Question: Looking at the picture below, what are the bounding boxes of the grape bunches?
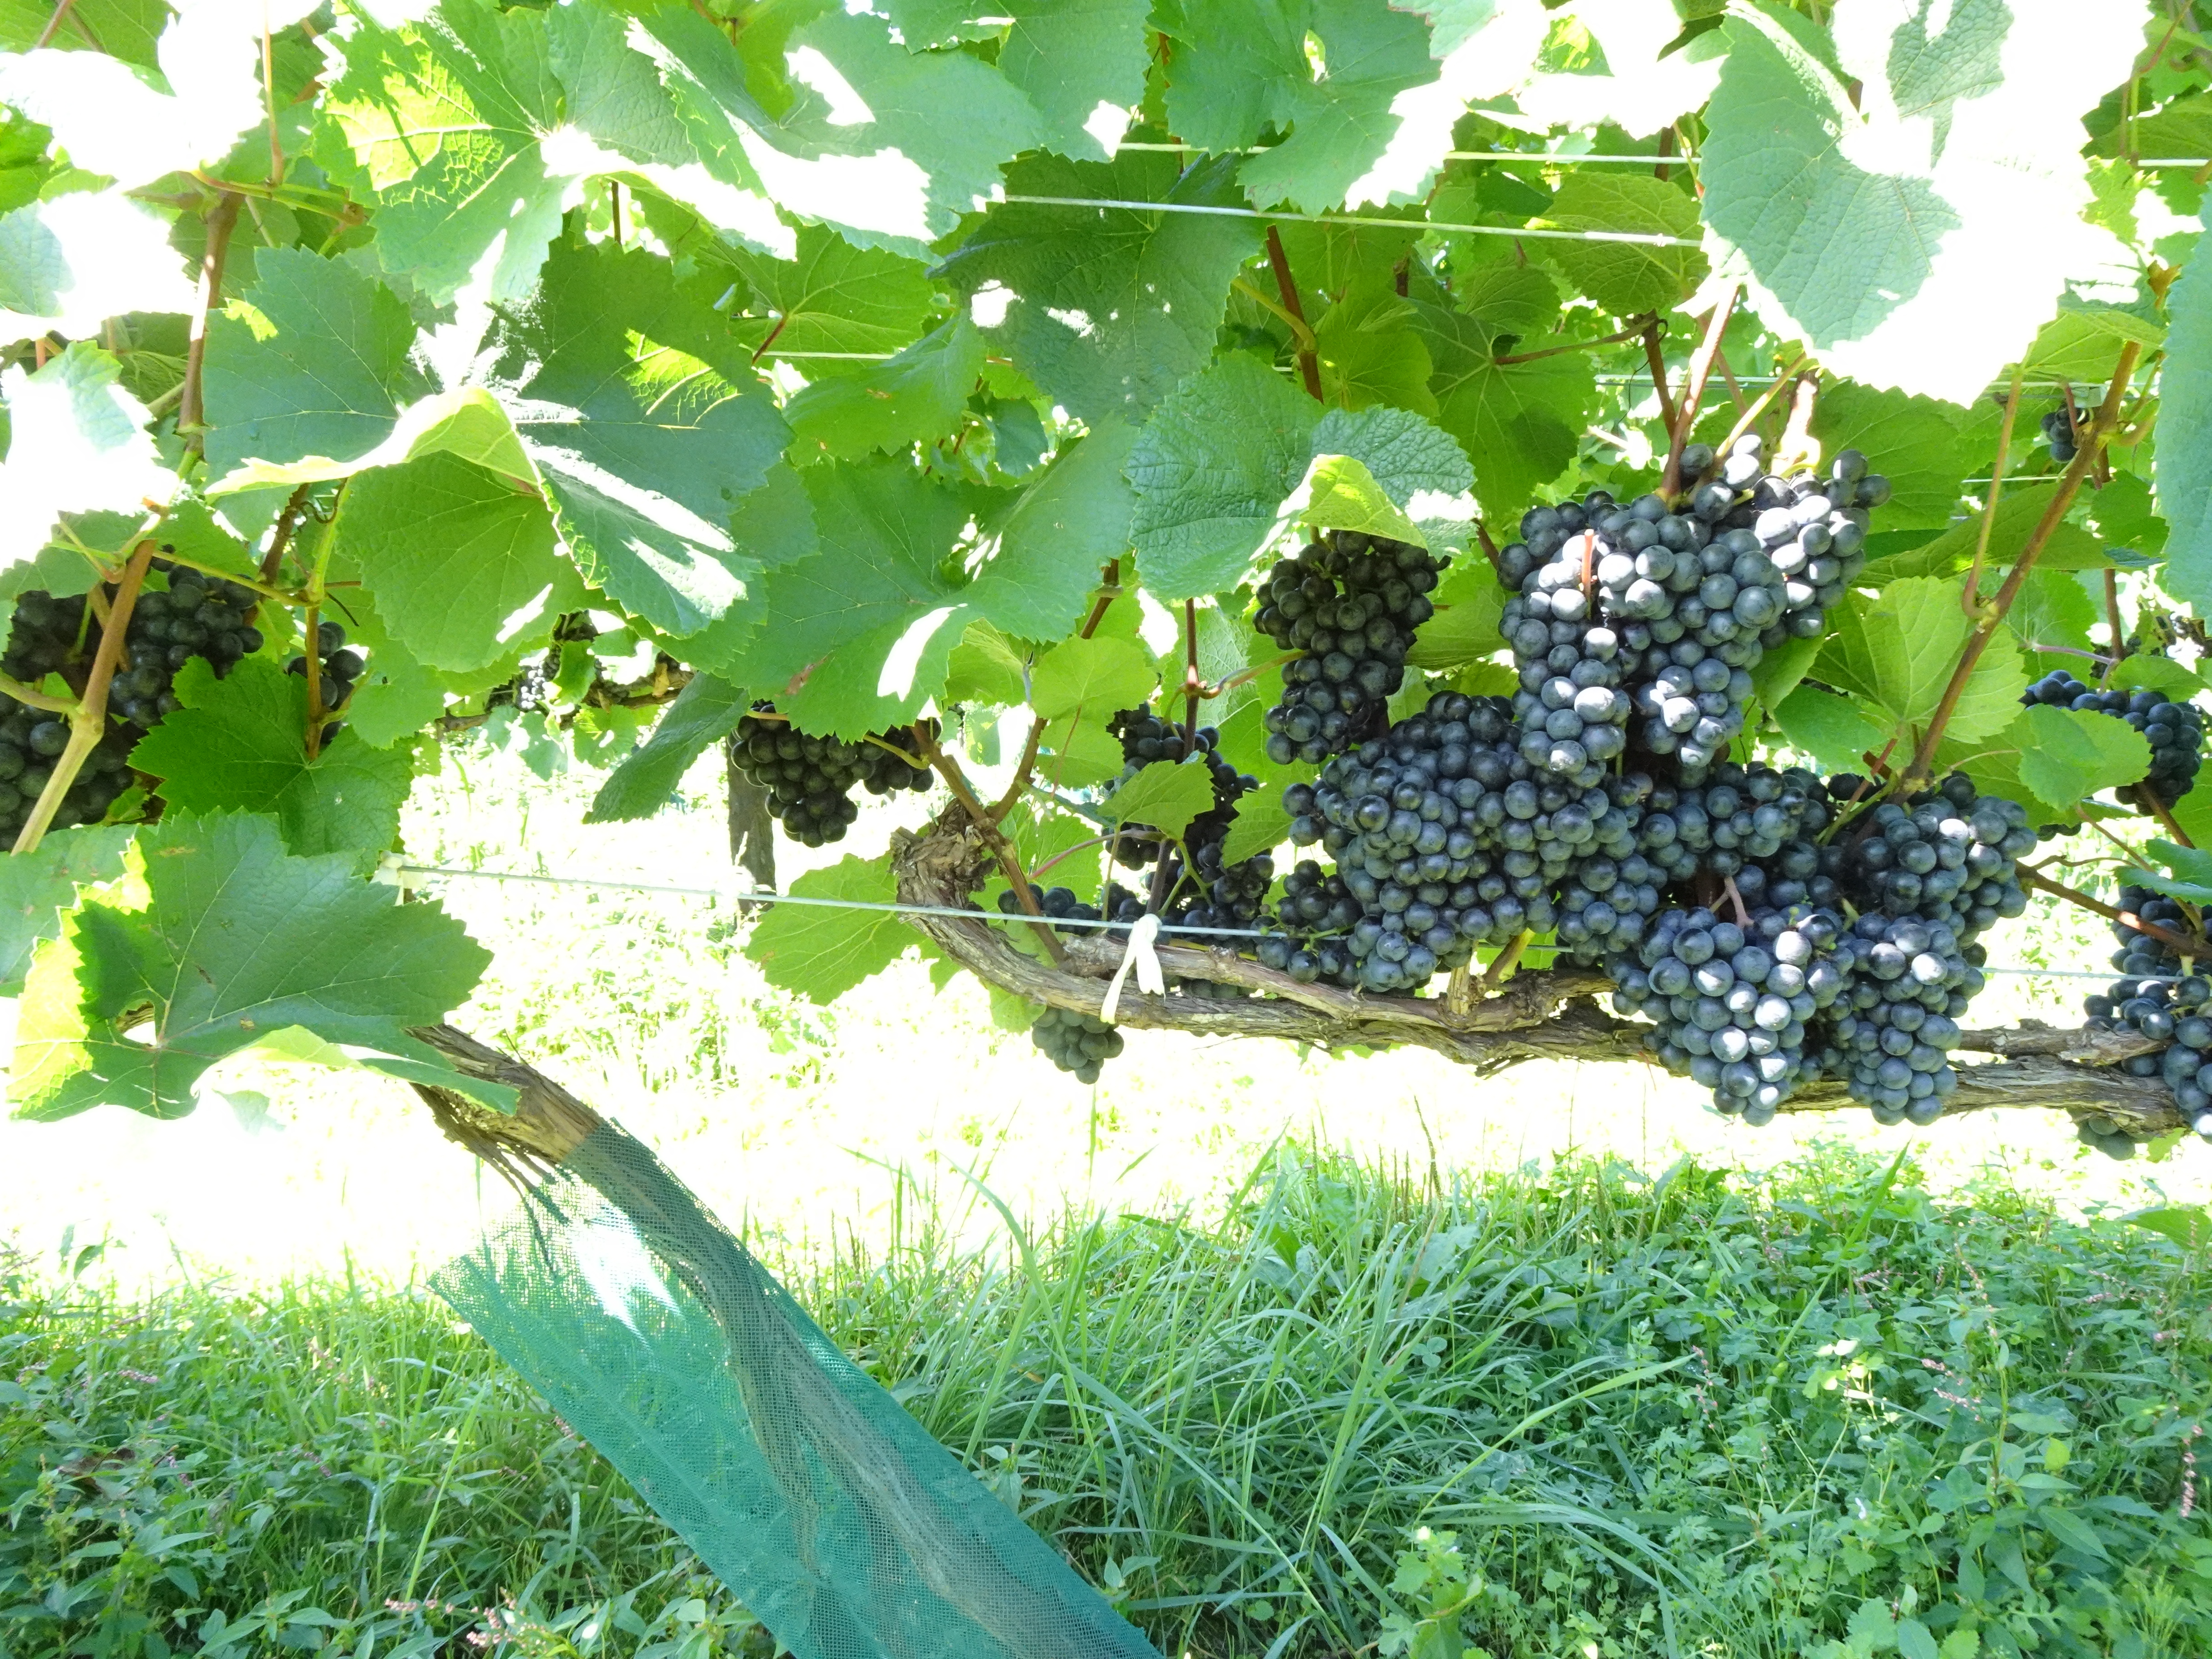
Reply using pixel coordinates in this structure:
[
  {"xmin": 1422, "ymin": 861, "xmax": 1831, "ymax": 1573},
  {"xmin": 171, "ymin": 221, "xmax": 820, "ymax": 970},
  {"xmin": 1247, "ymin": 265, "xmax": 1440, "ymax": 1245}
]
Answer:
[
  {"xmin": 1807, "ymin": 773, "xmax": 1880, "ymax": 806},
  {"xmin": 2116, "ymin": 690, "xmax": 2202, "ymax": 818},
  {"xmin": 1145, "ymin": 840, "xmax": 1273, "ymax": 999},
  {"xmin": 1855, "ymin": 771, "xmax": 2037, "ymax": 942},
  {"xmin": 2112, "ymin": 888, "xmax": 2212, "ymax": 1000},
  {"xmin": 997, "ymin": 883, "xmax": 1124, "ymax": 1083},
  {"xmin": 1251, "ymin": 859, "xmax": 1368, "ymax": 987},
  {"xmin": 1254, "ymin": 530, "xmax": 1451, "ymax": 764},
  {"xmin": 1552, "ymin": 930, "xmax": 1604, "ymax": 971},
  {"xmin": 108, "ymin": 566, "xmax": 264, "ymax": 730},
  {"xmin": 1679, "ymin": 435, "xmax": 1762, "ymax": 489},
  {"xmin": 1550, "ymin": 770, "xmax": 1716, "ymax": 966},
  {"xmin": 865, "ymin": 717, "xmax": 941, "ymax": 795},
  {"xmin": 1498, "ymin": 491, "xmax": 1652, "ymax": 786},
  {"xmin": 1102, "ymin": 701, "xmax": 1218, "ymax": 870},
  {"xmin": 0, "ymin": 581, "xmax": 121, "ymax": 682},
  {"xmin": 2040, "ymin": 396, "xmax": 2090, "ymax": 462},
  {"xmin": 2067, "ymin": 983, "xmax": 2136, "ymax": 1161},
  {"xmin": 1283, "ymin": 689, "xmax": 1528, "ymax": 992},
  {"xmin": 124, "ymin": 544, "xmax": 176, "ymax": 577},
  {"xmin": 1707, "ymin": 762, "xmax": 1833, "ymax": 878},
  {"xmin": 1101, "ymin": 882, "xmax": 1178, "ymax": 945},
  {"xmin": 1475, "ymin": 765, "xmax": 1629, "ymax": 934},
  {"xmin": 1742, "ymin": 801, "xmax": 1857, "ymax": 910},
  {"xmin": 1612, "ymin": 903, "xmax": 1855, "ymax": 1126},
  {"xmin": 1735, "ymin": 450, "xmax": 1893, "ymax": 648},
  {"xmin": 0, "ymin": 690, "xmax": 132, "ymax": 854},
  {"xmin": 727, "ymin": 699, "xmax": 886, "ymax": 848},
  {"xmin": 288, "ymin": 621, "xmax": 365, "ymax": 752},
  {"xmin": 1598, "ymin": 482, "xmax": 1788, "ymax": 766},
  {"xmin": 2017, "ymin": 670, "xmax": 2129, "ymax": 841},
  {"xmin": 1184, "ymin": 749, "xmax": 1259, "ymax": 843},
  {"xmin": 1835, "ymin": 912, "xmax": 1987, "ymax": 1125},
  {"xmin": 2116, "ymin": 976, "xmax": 2212, "ymax": 1142}
]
